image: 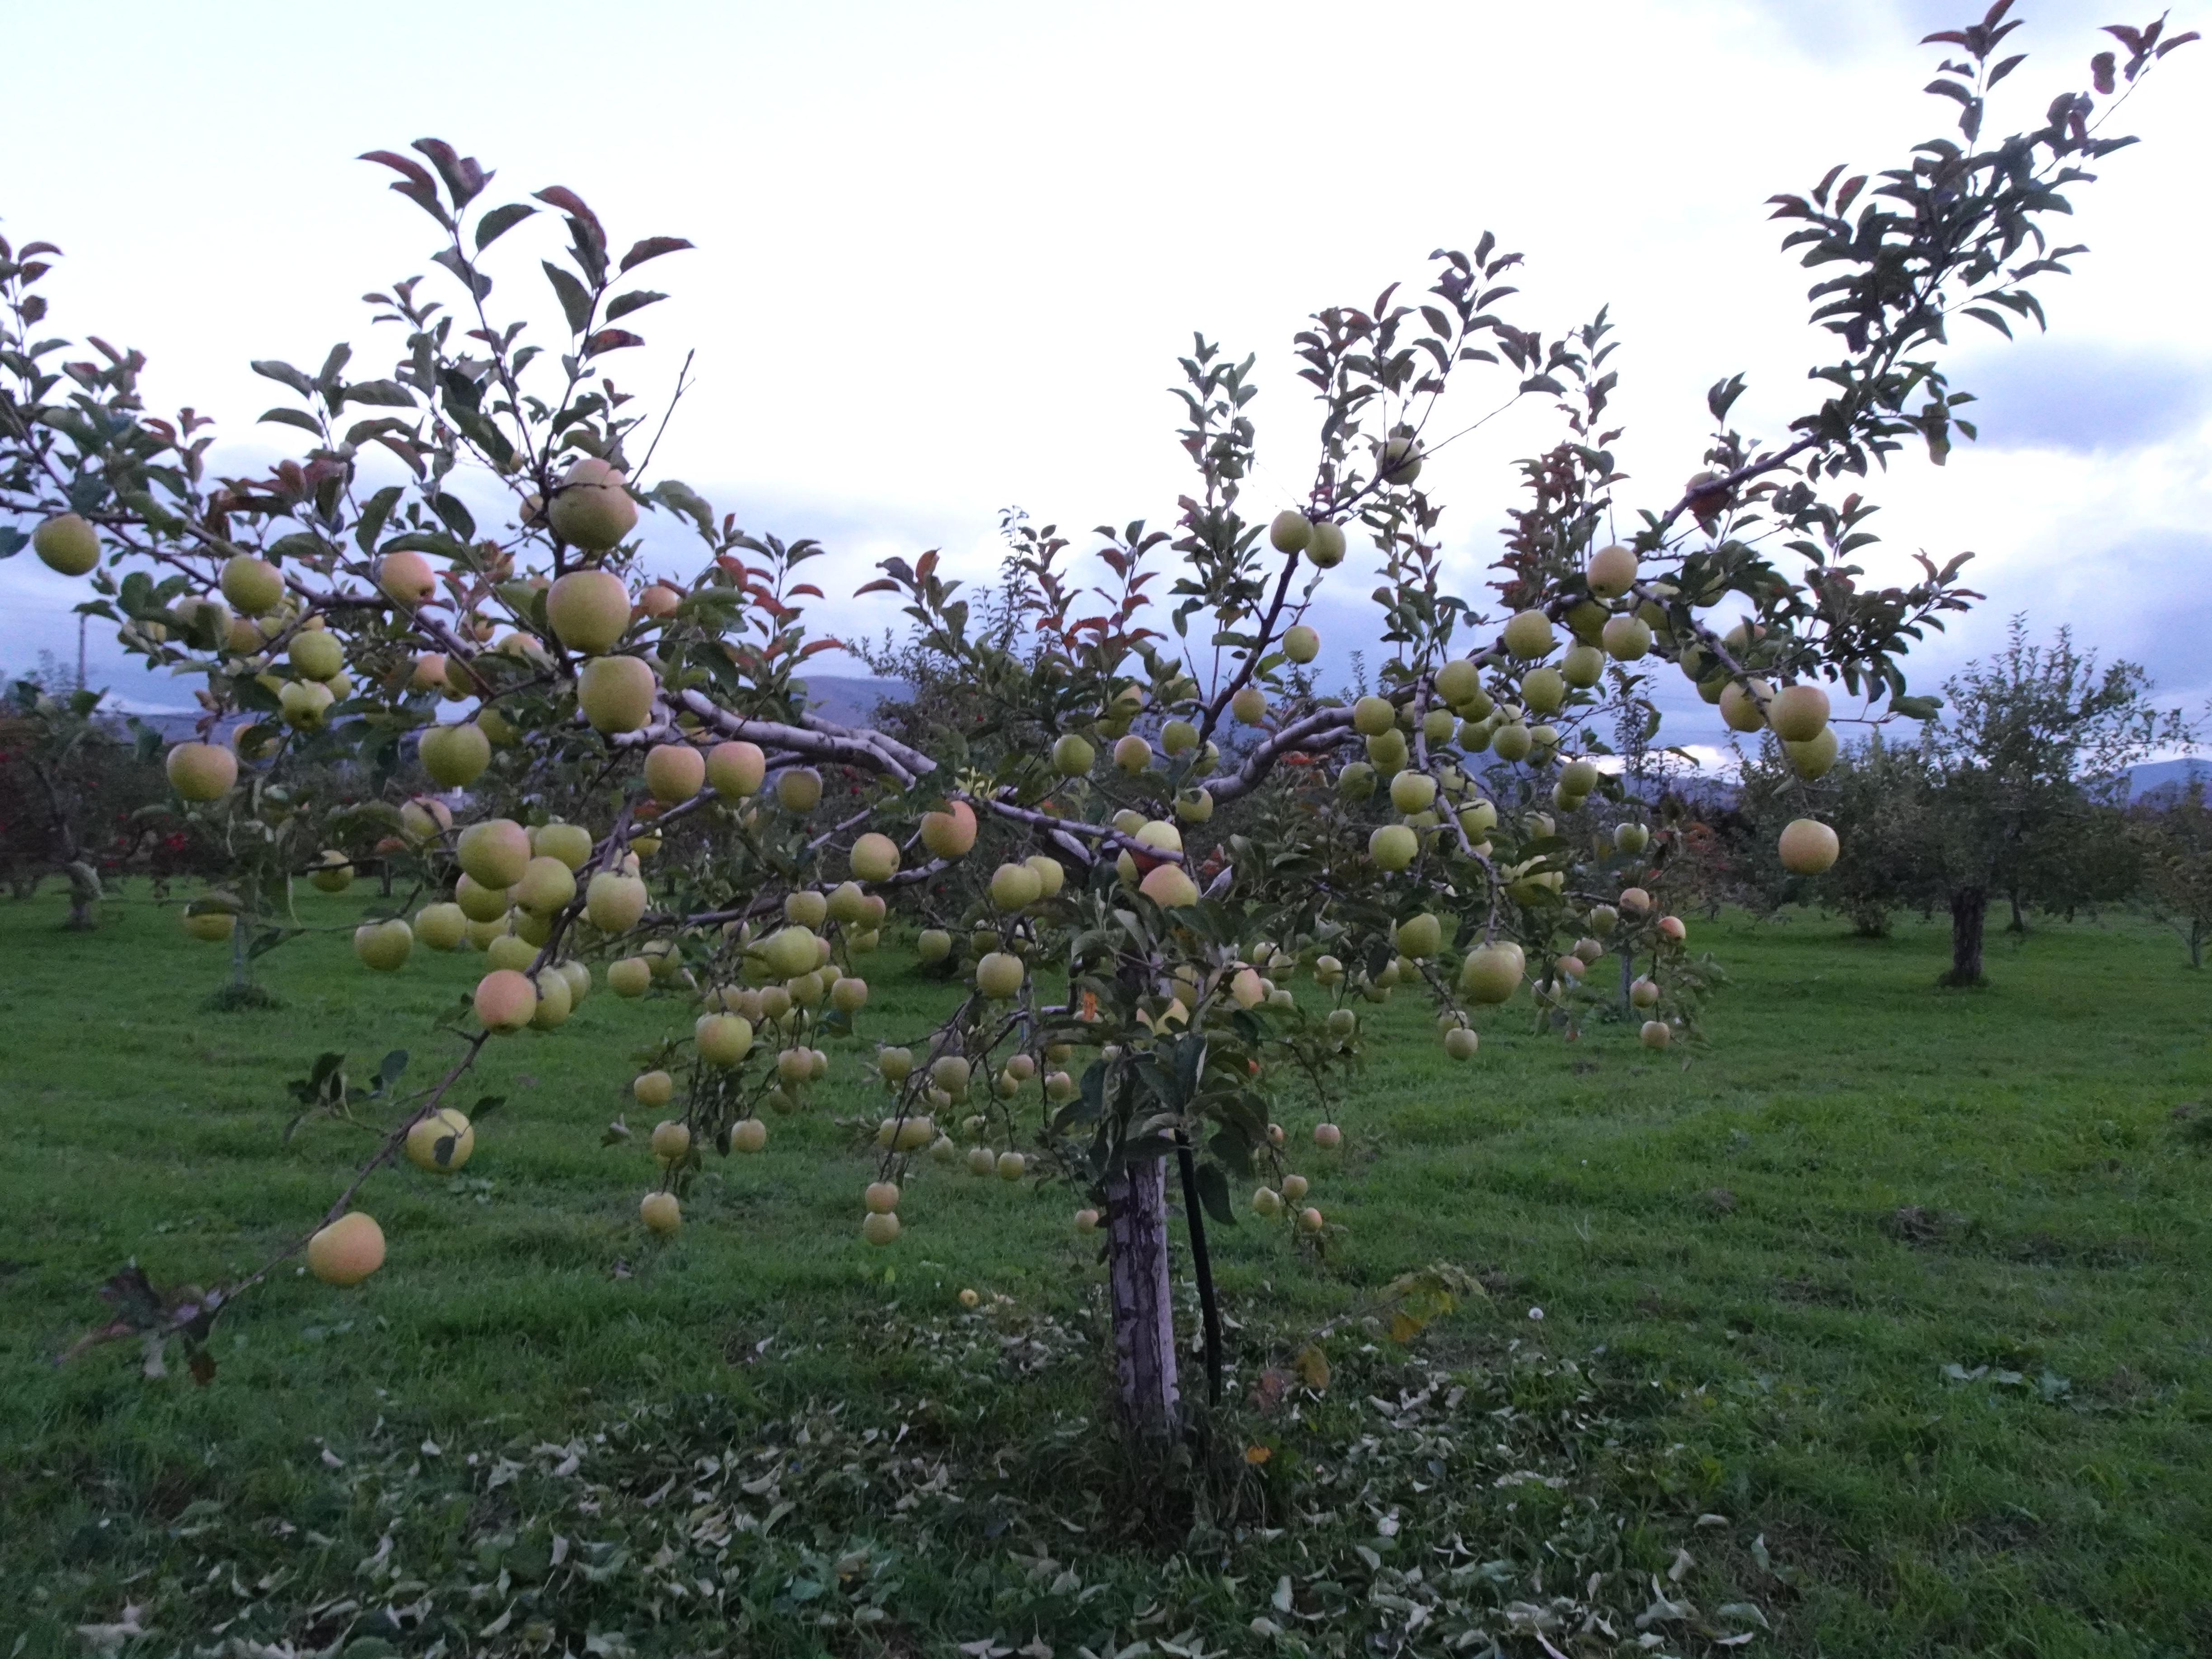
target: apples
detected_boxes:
[1269,952,1294,982]
[1283,746,1314,776]
[1234,689,1266,724]
[415,902,473,955]
[696,1012,753,1071]
[916,1076,955,1117]
[1769,688,1831,738]
[996,1149,1027,1184]
[1516,853,1568,897]
[1252,937,1279,972]
[631,1068,675,1109]
[1493,724,1531,763]
[1694,661,1738,705]
[233,720,287,765]
[352,913,418,973]
[1562,594,1612,632]
[1282,622,1322,667]
[929,1054,973,1091]
[993,1068,1020,1103]
[1446,1029,1478,1064]
[1680,635,1727,685]
[762,922,821,979]
[860,1211,910,1250]
[822,881,891,925]
[876,1115,918,1156]
[639,1189,683,1231]
[1046,1071,1072,1099]
[780,1005,815,1037]
[455,871,518,925]
[1205,958,1264,1026]
[497,447,527,474]
[215,622,261,663]
[180,893,238,939]
[456,819,530,891]
[841,922,880,953]
[927,1132,958,1163]
[1356,968,1390,1005]
[603,843,640,873]
[719,919,753,953]
[1426,830,1451,858]
[407,652,462,700]
[1520,667,1569,716]
[1353,695,1394,737]
[1584,543,1639,599]
[1531,980,1561,1012]
[220,552,288,614]
[520,975,575,1031]
[774,765,825,815]
[548,458,637,554]
[640,936,680,980]
[626,821,664,861]
[1374,439,1423,487]
[1640,1021,1673,1049]
[1139,862,1200,922]
[1688,552,1732,607]
[924,1026,967,1065]
[1490,700,1527,736]
[304,1208,388,1288]
[494,631,548,674]
[1618,888,1652,921]
[483,551,517,584]
[1553,955,1584,991]
[31,511,102,578]
[371,545,437,608]
[1438,1009,1468,1042]
[1431,765,1481,809]
[1181,738,1222,778]
[966,1147,1000,1177]
[1367,747,1417,780]
[1282,1174,1311,1198]
[1777,817,1840,879]
[1268,508,1311,555]
[919,799,980,860]
[1614,822,1649,859]
[474,699,530,750]
[533,821,593,878]
[1110,803,1154,848]
[1558,645,1608,691]
[519,490,551,530]
[534,953,589,1012]
[1655,912,1689,948]
[1519,725,1561,765]
[993,862,1041,917]
[165,742,239,801]
[1390,907,1443,960]
[651,1119,695,1158]
[474,966,540,1038]
[1136,994,1192,1053]
[706,740,765,795]
[1302,522,1349,569]
[830,976,871,1015]
[1114,839,1163,888]
[1103,677,1145,718]
[1339,759,1376,807]
[1389,768,1439,820]
[801,932,835,972]
[787,970,824,1008]
[546,570,631,655]
[1313,1122,1341,1152]
[1433,658,1483,709]
[469,911,527,951]
[777,1045,815,1085]
[901,1117,939,1144]
[485,933,552,988]
[1268,988,1301,1016]
[1240,1056,1264,1079]
[1474,939,1526,989]
[1252,1184,1282,1219]
[847,831,902,884]
[643,742,704,804]
[175,595,235,638]
[1723,623,1775,668]
[702,978,744,1020]
[1455,794,1500,847]
[575,655,658,737]
[279,682,337,730]
[304,847,355,892]
[1456,718,1497,756]
[398,793,454,851]
[1075,1207,1100,1236]
[1043,1035,1076,1066]
[516,808,569,857]
[1518,810,1558,849]
[1174,786,1216,824]
[1365,725,1406,764]
[959,1115,990,1145]
[1369,821,1418,872]
[1601,613,1654,663]
[404,1104,478,1176]
[975,949,1027,1000]
[1628,979,1661,1012]
[1134,821,1189,866]
[1500,609,1552,661]
[782,888,830,931]
[257,619,284,655]
[509,854,579,921]
[759,980,795,1022]
[1160,719,1199,758]
[640,582,679,624]
[1313,955,1344,989]
[1718,677,1774,736]
[1418,708,1455,749]
[878,1044,916,1083]
[587,872,646,935]
[607,955,650,997]
[459,608,497,643]
[716,795,762,831]
[729,1117,769,1155]
[1461,950,1517,1005]
[1151,667,1202,714]
[915,928,956,966]
[1296,1207,1324,1238]
[1007,1053,1035,1083]
[1574,933,1603,967]
[1089,702,1133,741]
[289,629,345,685]
[415,720,492,787]
[1585,904,1619,939]
[1054,731,1094,778]
[1551,781,1592,815]
[1557,759,1602,797]
[1327,1006,1356,1039]
[1020,851,1068,900]
[1684,470,1731,517]
[863,1177,904,1216]
[281,604,326,644]
[316,671,356,702]
[1115,733,1151,778]
[1261,1121,1287,1147]
[1780,725,1841,781]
